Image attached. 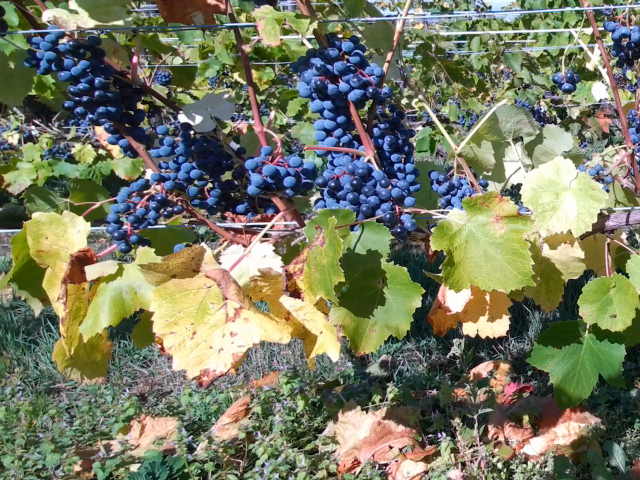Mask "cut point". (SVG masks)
<instances>
[{"label": "cut point", "instance_id": "obj_1", "mask_svg": "<svg viewBox=\"0 0 640 480\" xmlns=\"http://www.w3.org/2000/svg\"><path fill=\"white\" fill-rule=\"evenodd\" d=\"M266 132L269 133V135L274 138L276 140L277 143L281 142V138L278 137L273 131H271L270 129L266 128Z\"/></svg>", "mask_w": 640, "mask_h": 480}, {"label": "cut point", "instance_id": "obj_2", "mask_svg": "<svg viewBox=\"0 0 640 480\" xmlns=\"http://www.w3.org/2000/svg\"><path fill=\"white\" fill-rule=\"evenodd\" d=\"M369 160H371V163H372V165L374 166L375 170H379L378 165L375 163V161H374V159H373L372 157H366V158H365V160H364V162H367V161H369Z\"/></svg>", "mask_w": 640, "mask_h": 480}]
</instances>
